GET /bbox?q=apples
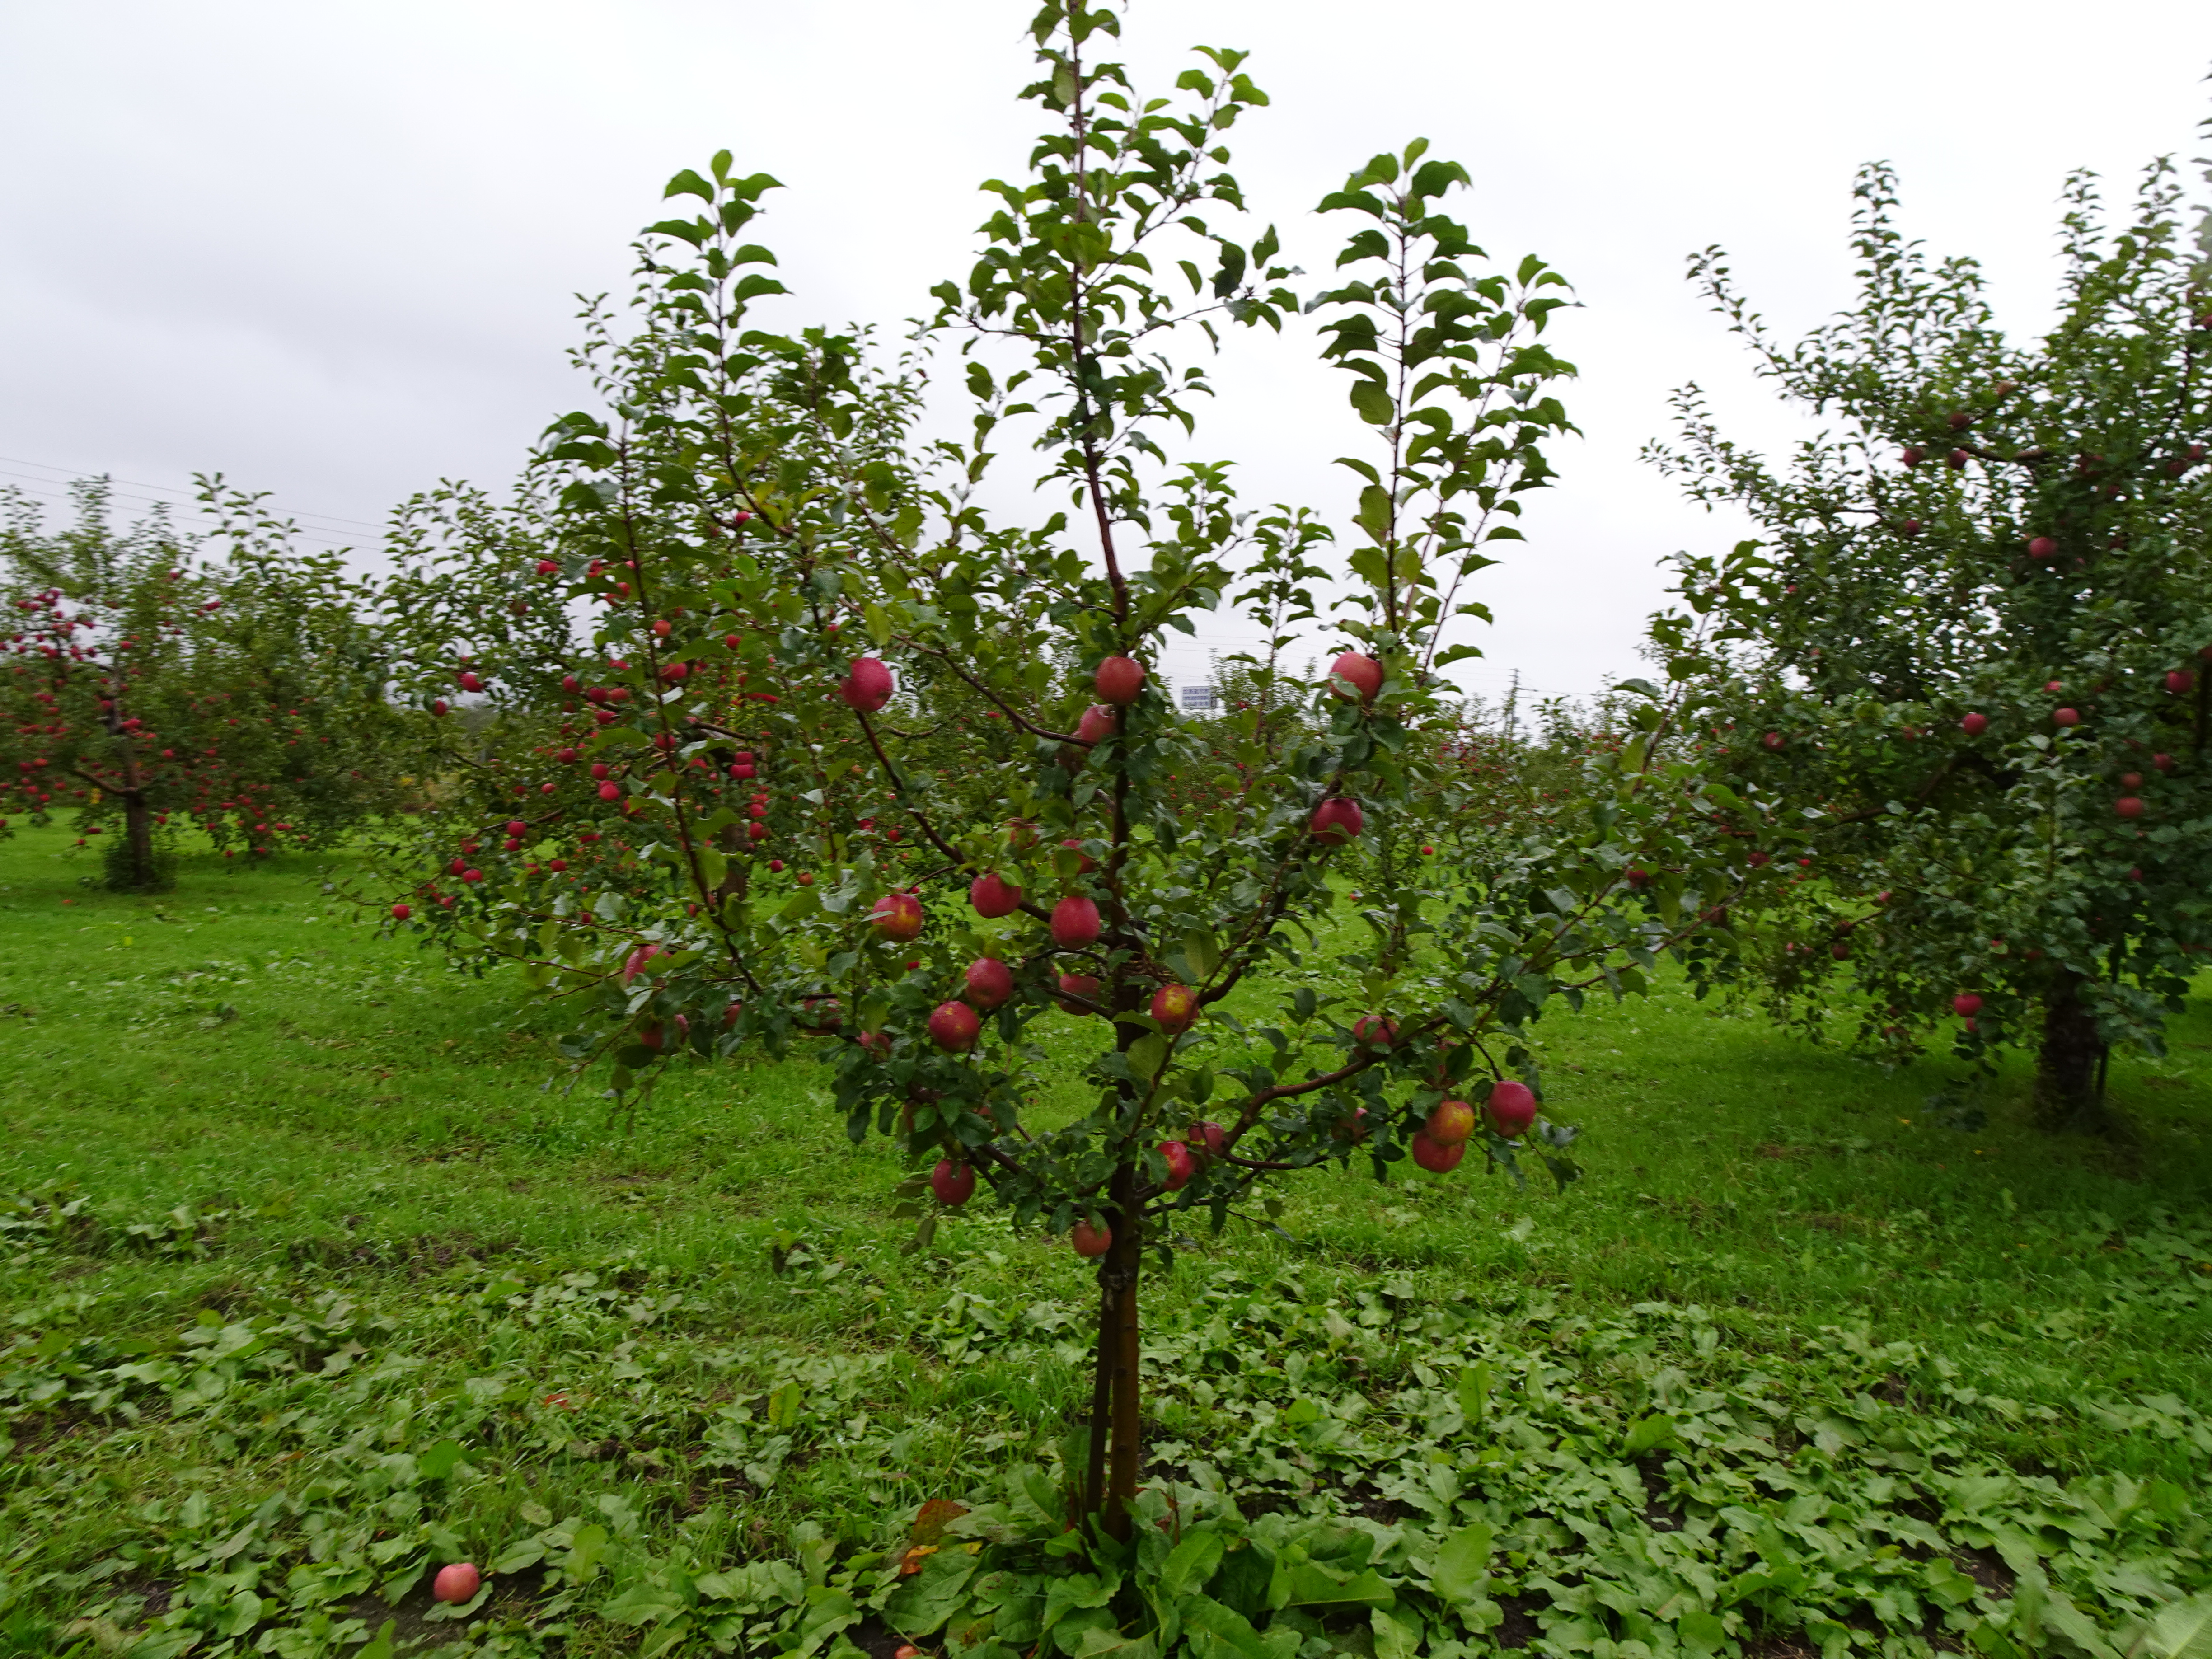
[1423,1040,1461,1090]
[1079,704,1116,743]
[1352,1015,1399,1060]
[1480,1080,1535,1137]
[840,657,893,713]
[903,1088,946,1133]
[1412,1128,1465,1174]
[1331,1107,1368,1146]
[1151,983,1199,1035]
[873,893,922,943]
[855,1029,893,1058]
[640,1014,687,1055]
[1053,839,1093,882]
[1057,732,1092,772]
[1002,818,1039,851]
[1328,652,1383,705]
[1023,966,1058,1005]
[803,998,843,1036]
[722,1004,742,1030]
[974,1106,1002,1137]
[625,946,672,992]
[932,1158,975,1206]
[1155,1141,1195,1191]
[1427,1101,1475,1145]
[1059,973,1099,1016]
[1311,797,1363,845]
[1189,1122,1225,1152]
[928,1000,980,1055]
[906,962,919,971]
[970,871,1022,918]
[1096,656,1145,706]
[1050,896,1100,950]
[1072,1219,1112,1257]
[964,957,1013,1010]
